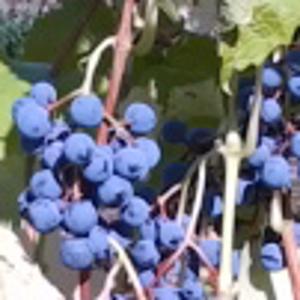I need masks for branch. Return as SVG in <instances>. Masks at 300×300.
<instances>
[{
  "label": "branch",
  "mask_w": 300,
  "mask_h": 300,
  "mask_svg": "<svg viewBox=\"0 0 300 300\" xmlns=\"http://www.w3.org/2000/svg\"><path fill=\"white\" fill-rule=\"evenodd\" d=\"M231 95L228 97V126L225 137L226 178L223 191L222 238L217 272L218 300H232V261L237 228L234 218L238 199L241 169V132L239 102L241 101V74H231Z\"/></svg>",
  "instance_id": "30e6481e"
},
{
  "label": "branch",
  "mask_w": 300,
  "mask_h": 300,
  "mask_svg": "<svg viewBox=\"0 0 300 300\" xmlns=\"http://www.w3.org/2000/svg\"><path fill=\"white\" fill-rule=\"evenodd\" d=\"M133 10L134 0H125L124 10L113 42L112 73L103 98V118L101 125L96 130L98 144H106L117 127L119 111L117 101L133 42V26L130 23Z\"/></svg>",
  "instance_id": "325d2c04"
}]
</instances>
